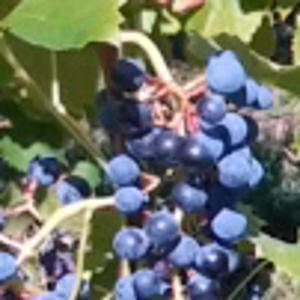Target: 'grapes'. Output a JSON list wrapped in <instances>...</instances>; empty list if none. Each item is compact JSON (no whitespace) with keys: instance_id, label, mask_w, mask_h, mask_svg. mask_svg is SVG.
Segmentation results:
<instances>
[{"instance_id":"grapes-1","label":"grapes","mask_w":300,"mask_h":300,"mask_svg":"<svg viewBox=\"0 0 300 300\" xmlns=\"http://www.w3.org/2000/svg\"><path fill=\"white\" fill-rule=\"evenodd\" d=\"M204 72L179 83L144 74L129 59L110 63L109 74L123 92L111 90L96 96L102 124L123 138L126 153L108 163L109 179L115 185L116 210L136 216L148 204L141 183L139 161L156 167L191 170L216 168L217 184L210 187L195 178L172 186V202L185 214L207 211V235L211 243L200 245L179 232L168 211L149 213L141 226H125L111 238V248L120 261L147 258L159 246L163 258L151 269L135 271L112 286L116 300L167 299L172 294L171 268H190L188 300H222L224 282L243 271V256L235 245L249 230V221L237 211V191L260 187L265 166L250 148L249 127L239 112H228L226 98L253 110H268L272 90L249 77L247 65L230 49L209 52L203 58Z\"/></svg>"},{"instance_id":"grapes-2","label":"grapes","mask_w":300,"mask_h":300,"mask_svg":"<svg viewBox=\"0 0 300 300\" xmlns=\"http://www.w3.org/2000/svg\"><path fill=\"white\" fill-rule=\"evenodd\" d=\"M62 174V164L56 158H44L36 155L30 158L27 175L37 187H51L55 185Z\"/></svg>"},{"instance_id":"grapes-3","label":"grapes","mask_w":300,"mask_h":300,"mask_svg":"<svg viewBox=\"0 0 300 300\" xmlns=\"http://www.w3.org/2000/svg\"><path fill=\"white\" fill-rule=\"evenodd\" d=\"M92 189L88 180L80 176H70L59 182L56 198L61 204H72L77 200L87 199Z\"/></svg>"},{"instance_id":"grapes-4","label":"grapes","mask_w":300,"mask_h":300,"mask_svg":"<svg viewBox=\"0 0 300 300\" xmlns=\"http://www.w3.org/2000/svg\"><path fill=\"white\" fill-rule=\"evenodd\" d=\"M76 282V273L66 270L53 281L49 289L40 293L39 300H69Z\"/></svg>"},{"instance_id":"grapes-5","label":"grapes","mask_w":300,"mask_h":300,"mask_svg":"<svg viewBox=\"0 0 300 300\" xmlns=\"http://www.w3.org/2000/svg\"><path fill=\"white\" fill-rule=\"evenodd\" d=\"M18 270V260L16 256L5 250H0V282L10 280Z\"/></svg>"}]
</instances>
